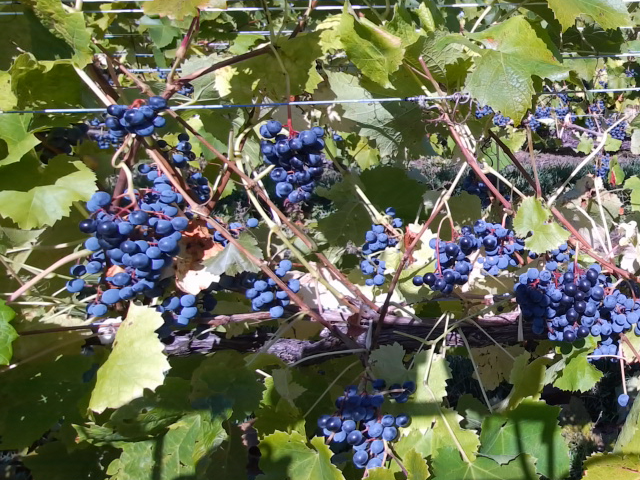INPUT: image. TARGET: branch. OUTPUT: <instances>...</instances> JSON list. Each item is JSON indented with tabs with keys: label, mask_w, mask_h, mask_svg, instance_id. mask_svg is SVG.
<instances>
[{
	"label": "branch",
	"mask_w": 640,
	"mask_h": 480,
	"mask_svg": "<svg viewBox=\"0 0 640 480\" xmlns=\"http://www.w3.org/2000/svg\"><path fill=\"white\" fill-rule=\"evenodd\" d=\"M88 71L85 68H82L78 75L80 76V80L86 84L93 94L96 96L98 100H100L104 105H109L111 100L106 98L97 87V84L94 82L92 76L100 83V85L108 92L110 95L118 101L120 104L125 102V99L122 95H120L109 83L105 80V78L97 71V69L89 64L87 66Z\"/></svg>",
	"instance_id": "branch-4"
},
{
	"label": "branch",
	"mask_w": 640,
	"mask_h": 480,
	"mask_svg": "<svg viewBox=\"0 0 640 480\" xmlns=\"http://www.w3.org/2000/svg\"><path fill=\"white\" fill-rule=\"evenodd\" d=\"M407 72L409 73V75L411 76V78L414 80L416 86L425 94V95H433V92L428 89L424 83L422 82L421 78L418 76L417 72L415 71V69L413 67H409L407 69Z\"/></svg>",
	"instance_id": "branch-7"
},
{
	"label": "branch",
	"mask_w": 640,
	"mask_h": 480,
	"mask_svg": "<svg viewBox=\"0 0 640 480\" xmlns=\"http://www.w3.org/2000/svg\"><path fill=\"white\" fill-rule=\"evenodd\" d=\"M125 186V171L120 169L118 171V176L115 178V185L112 192V201L115 205H118L122 200V197L119 195L124 191Z\"/></svg>",
	"instance_id": "branch-6"
},
{
	"label": "branch",
	"mask_w": 640,
	"mask_h": 480,
	"mask_svg": "<svg viewBox=\"0 0 640 480\" xmlns=\"http://www.w3.org/2000/svg\"><path fill=\"white\" fill-rule=\"evenodd\" d=\"M433 104L440 111V114L442 115V119L444 120V124L448 127V131L450 133V136L452 137V140L454 141L455 145L459 149L460 153L463 155L464 160L462 161L461 166L457 170L456 174L454 175V177L451 180L450 184L447 186L446 190L444 191L443 195L441 196V198L438 201V203L436 204V206L428 214V217L422 222L421 226L418 228V231L412 237V240L408 243L406 248L401 253V256L399 258V261H398V264L396 266L395 272L392 274L391 281H390V283L388 285V288H387V290L385 292L384 299H383L381 307L379 305H375L345 275L340 273V271L336 268V266L330 260H328L325 255H323L322 253H320L317 250H315L311 246V243H310L308 237L306 236V233L303 231V229L296 222L291 220L277 206V204L274 202V200L272 198L268 197V195L265 193V191L262 189V187L254 179H252L250 176L246 175V170H245V164H244V160H243L242 150H243V145L245 144L247 138L254 131V128L252 126H249L239 136V138L236 141V144H235V157H236L237 166H235L225 156H223L215 148V146L210 142V140L208 138H205L203 136V134L200 131H198L194 127V125L192 123H190L185 117H183L181 114H179L175 110H170L169 108L166 110V113L169 116H171L172 118L176 119L178 122L183 124L189 130V132L202 145L206 146V148L212 153V155L219 162H221L223 165H225L228 168V170L225 172V174H224V176H223V178L221 180V183H220L218 189L214 193V195H213L211 201L208 203L206 209H204L201 206H199L195 202V200L192 198V196L188 192H186L184 190L185 182L181 178L180 174L174 169V166L171 164L169 159L162 152H160L159 150H157L156 148H154L151 145V143H150V141H149V139L147 137H144V138L140 139V137L138 135H135L131 139L130 145H129V148H128V153H127V155L125 157V163H126V165L128 167H132L134 165V160H135V156H136V153H137V149L139 147V144H141L144 147V149L147 151V153L150 155L151 159L154 161V164L156 165V167L162 173L164 179L168 182V184L170 186H172L173 188H175L177 190V193L179 195H181L187 201V203L189 204V206L193 210H195L197 213H199L203 217H205L208 220H210V222L216 227V229L224 237H226L229 240L230 244L236 250H238L246 259L251 261L258 269H261L262 273L265 276H267L269 279L273 280L274 283L280 288V290L290 300L295 302V304L297 306H299V308H302L307 315H309L311 318H313L316 322H318L319 324H321L325 328H328L331 331V334L334 337H336L338 340H341L345 345L349 346L351 349H355L357 347V344L353 340H351L344 333L339 332L336 328H334L333 326H331L327 322H325L324 319L321 317V315L318 312H314L312 310V308L309 305H307L299 296H297L296 294L291 292L289 290V288L281 281V279L274 272L270 271L266 266H264V264L257 257H255L244 246H242L236 240L234 235L231 232H228L227 229L223 226V224L210 212L212 210L214 204L217 202L218 197L220 196V194L224 190L226 182L228 181L231 173L233 172L236 176H238L240 178L243 190H244L245 195L247 196L248 200L250 201V204L261 214L263 220L274 230V232L277 235V237L279 238V240L284 243V245L291 252V254L310 273V275L314 279H316L318 282H320V284L323 287H325L328 291H330L336 297L341 299L344 303L348 304L349 307L359 317H364L366 315V312L364 310H362L359 306H357L355 301L352 298L346 296L342 291H340L335 286L330 284L322 275H320L317 272V270L311 264H309L307 262V260L304 258V256L296 249V247L292 244V242L284 235L282 229L278 226V224L276 222H274V220L269 216L268 212L266 211V208L264 206H262L257 201V199L255 198L250 186L252 188H254V190L261 197L262 201L267 206H270V209L274 213H276V215L287 226L291 227L292 229H294L296 231V233L299 235V238L301 239L302 244L304 245V248L306 249V251L311 256H313L316 259H318L319 261H321L330 270V272L334 275V277L337 280H340L344 285H346L347 288L356 297H358L371 311L379 312V315H378V318H377V321H376V325H375V329H374V332H373L371 340H370V346L372 348H375L377 346V342H378L379 336L381 335V332H382L383 323H384V320H385V317H386V314H387V311H388V307L390 305L392 294H393V292L395 290V287H396V285L398 283V279H399L400 275L402 274V271H403V268L405 266V263H406V260L408 258V255L410 254V252L414 248H416L418 246L419 239L423 236V234L425 233V230L428 228L430 223L435 219L437 214L443 209L445 203L449 199L450 195L453 193L454 188L457 186V184L460 181L461 177L463 176L464 172L467 170L468 165L470 166V168L474 172H476L482 178V180L486 183V185L489 187L491 192L498 199H500V201L502 203H504V206L506 207V210L511 215H515L517 213V210L513 207L511 201L496 187V184L492 181V179L487 175V173L482 168H480L474 162L473 158L471 157L476 153L477 147L479 146L481 140L487 135V132L490 135L491 139L495 143H497L503 149V151L509 156V158L515 163V165L518 167V169L520 170L522 175L528 180V183L531 186V188L533 190H537L538 189V186L535 184V182L533 180V177L529 173H527V171L524 168V166L514 156V154L506 146V144L503 143L495 135V133H494V131L492 129H490L491 125L494 122L495 116H496V112L494 110H491L489 112L487 120L484 123L482 129L480 130V132L474 138L472 144L470 145L469 150H467L466 147L464 146V144L462 143L459 135L457 134V131L455 129V125L451 121V118L449 117V113H448L447 109L444 107V105L439 100H434Z\"/></svg>",
	"instance_id": "branch-1"
},
{
	"label": "branch",
	"mask_w": 640,
	"mask_h": 480,
	"mask_svg": "<svg viewBox=\"0 0 640 480\" xmlns=\"http://www.w3.org/2000/svg\"><path fill=\"white\" fill-rule=\"evenodd\" d=\"M550 209L554 213V215L558 217V219L561 221L563 226L565 228H567L573 234V236H570L568 238V241L570 243H572L575 246H577L580 250H582L584 253H586L594 261H596L600 265L604 266L605 268L609 269L610 271H613L615 274L623 276V277L630 278L634 282H637L638 284H640V276L639 275H637L636 273H634L632 271L625 270L623 268H619L615 264H612L608 260H606V259L602 258L601 256H599L598 254H596L594 251H592L591 245L586 240H584L583 237H581L578 234V231L566 221L564 216L558 211V209L554 205H551Z\"/></svg>",
	"instance_id": "branch-3"
},
{
	"label": "branch",
	"mask_w": 640,
	"mask_h": 480,
	"mask_svg": "<svg viewBox=\"0 0 640 480\" xmlns=\"http://www.w3.org/2000/svg\"><path fill=\"white\" fill-rule=\"evenodd\" d=\"M95 47L101 53H103L107 58H109L114 64H116L128 76L129 80L132 83L142 88L149 95H152L154 93V90L151 86H149L147 83L137 78L135 74L132 72V70L129 67H127L115 54H113L105 46H103V44L100 41H97L95 43Z\"/></svg>",
	"instance_id": "branch-5"
},
{
	"label": "branch",
	"mask_w": 640,
	"mask_h": 480,
	"mask_svg": "<svg viewBox=\"0 0 640 480\" xmlns=\"http://www.w3.org/2000/svg\"><path fill=\"white\" fill-rule=\"evenodd\" d=\"M270 45H273L276 48V45L274 43H270L266 47H263V48H260V49H255V50L248 51V52H243V53L236 54V55H233V56H229L226 59H223L221 61L215 62L214 64H212L209 67H205V68H201V69H198L196 71H193L189 75H187V76H185V77H183V78H181L179 80H176L175 82L169 84L164 89V91L162 92V96L164 98H170L173 95V92H174L175 89H177V88H179V87H181L183 85H186L187 83L191 82L195 78H199L200 76L211 74L214 71H216V70H218L220 68H223L225 66H228L231 63H235V62L242 61V60H245V59H250V58H254V57H257V56H262V55L271 53L272 51L269 49Z\"/></svg>",
	"instance_id": "branch-2"
}]
</instances>
